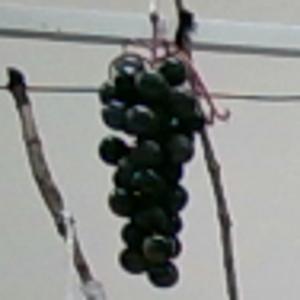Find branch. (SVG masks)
<instances>
[{
    "instance_id": "45aa463d",
    "label": "branch",
    "mask_w": 300,
    "mask_h": 300,
    "mask_svg": "<svg viewBox=\"0 0 300 300\" xmlns=\"http://www.w3.org/2000/svg\"><path fill=\"white\" fill-rule=\"evenodd\" d=\"M187 82H188L190 92L192 93V95H194L196 97V99H198V101L201 104V107H203L201 95H200L199 90H198V82L196 80V77L194 76L193 69H192V72H191V76L188 77V79H187Z\"/></svg>"
},
{
    "instance_id": "325d2c04",
    "label": "branch",
    "mask_w": 300,
    "mask_h": 300,
    "mask_svg": "<svg viewBox=\"0 0 300 300\" xmlns=\"http://www.w3.org/2000/svg\"><path fill=\"white\" fill-rule=\"evenodd\" d=\"M199 143L203 149V161L205 170L208 173L210 186L217 216L218 236L220 247L223 252V277L225 281L226 300H240L237 285V270L234 266V221L231 218L230 204L227 188L223 177L219 156L213 143V138L209 133L208 122L200 133Z\"/></svg>"
},
{
    "instance_id": "170604dd",
    "label": "branch",
    "mask_w": 300,
    "mask_h": 300,
    "mask_svg": "<svg viewBox=\"0 0 300 300\" xmlns=\"http://www.w3.org/2000/svg\"><path fill=\"white\" fill-rule=\"evenodd\" d=\"M174 1V12L177 18V27L174 31V45L177 53L183 60L193 63V34H197L200 23L196 21L195 12L185 7L183 0Z\"/></svg>"
},
{
    "instance_id": "30e6481e",
    "label": "branch",
    "mask_w": 300,
    "mask_h": 300,
    "mask_svg": "<svg viewBox=\"0 0 300 300\" xmlns=\"http://www.w3.org/2000/svg\"><path fill=\"white\" fill-rule=\"evenodd\" d=\"M6 89L12 96L21 122V137L28 156V166L38 193L54 223L58 237L63 240L69 255L73 274L78 281L85 300H108V293L90 271L84 256L83 241L75 227L77 220L65 208L64 199L49 168L46 150L38 134L32 112V101L27 91L26 76L15 66L5 65Z\"/></svg>"
}]
</instances>
